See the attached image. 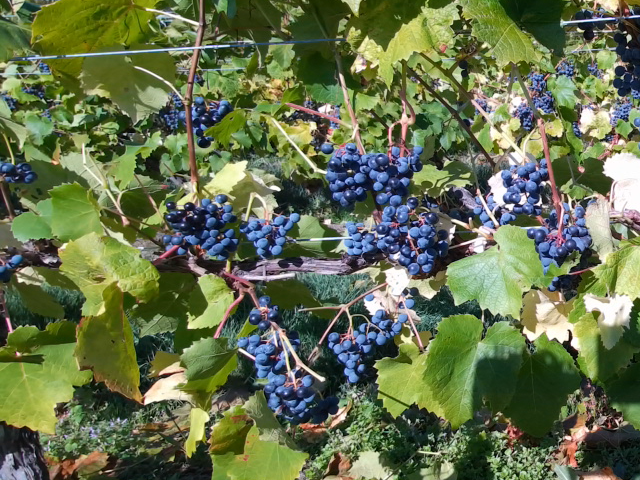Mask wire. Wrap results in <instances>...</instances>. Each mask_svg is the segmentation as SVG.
Masks as SVG:
<instances>
[{
    "label": "wire",
    "mask_w": 640,
    "mask_h": 480,
    "mask_svg": "<svg viewBox=\"0 0 640 480\" xmlns=\"http://www.w3.org/2000/svg\"><path fill=\"white\" fill-rule=\"evenodd\" d=\"M626 19H640V13L637 14H624V15H614L608 17H590L586 19H570L563 20L559 22L560 26L572 25V24H589L593 22H619L620 20Z\"/></svg>",
    "instance_id": "wire-2"
},
{
    "label": "wire",
    "mask_w": 640,
    "mask_h": 480,
    "mask_svg": "<svg viewBox=\"0 0 640 480\" xmlns=\"http://www.w3.org/2000/svg\"><path fill=\"white\" fill-rule=\"evenodd\" d=\"M345 36H333V37H320V38H302L295 40H260L254 42H239V43H230V44H217V45H196L189 47H161L157 49L151 48H140V49H118V50H104L99 51L98 53L88 52V53H64V54H39L36 56H22V57H10V62H24V61H38L41 59H66V58H100L102 56L107 55H123V54H159V53H169V52H192L199 50H220V49H232V48H241V47H256L262 45H272V46H283V45H297L304 43H322V42H336V41H345Z\"/></svg>",
    "instance_id": "wire-1"
}]
</instances>
